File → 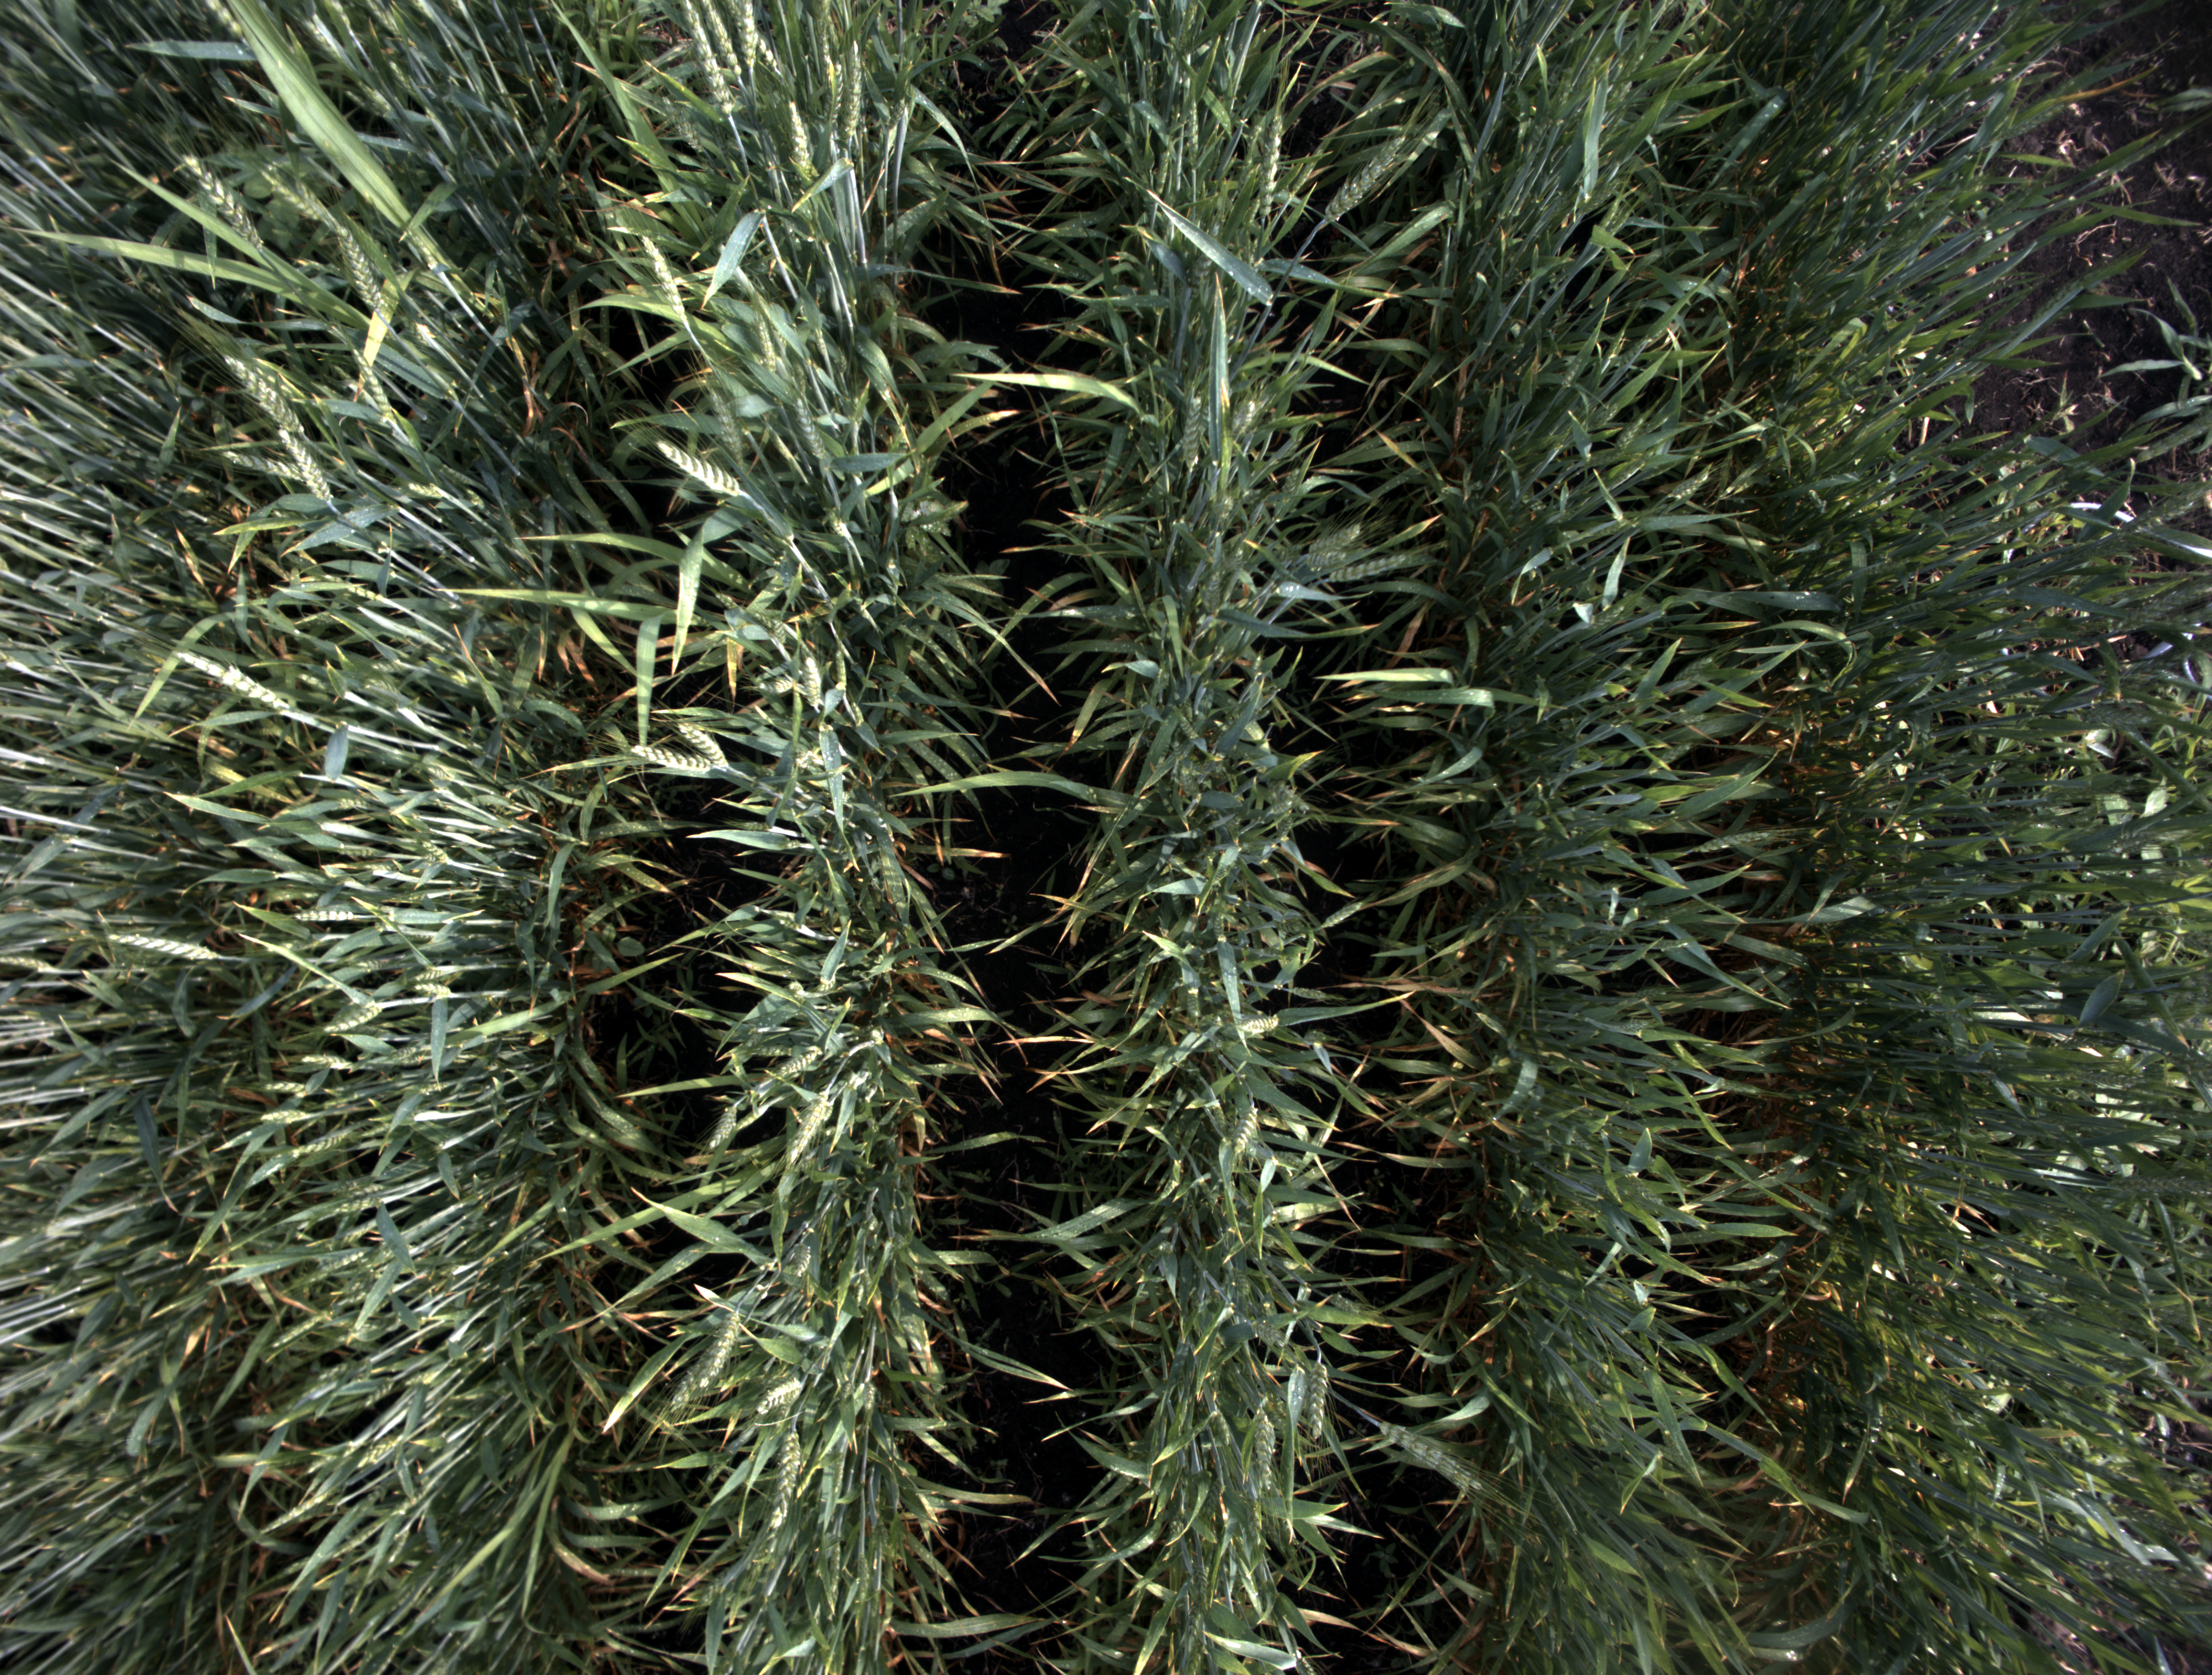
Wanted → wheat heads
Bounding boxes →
[640,232,685,315]
[2021,76,2080,113]
[1224,547,1243,572]
[337,798,371,810]
[743,819,771,832]
[2164,1049,2211,1084]
[2026,1307,2073,1328]
[301,1380,331,1398]
[1976,1357,2016,1380]
[332,1176,360,1194]
[754,1375,803,1413]
[696,1307,740,1389]
[1993,102,2062,141]
[1587,1358,1615,1388]
[276,429,333,501]
[2034,1274,2097,1304]
[1579,178,1622,214]
[390,56,417,95]
[1291,148,1321,195]
[350,1272,375,1292]
[741,0,759,69]
[1579,1199,1602,1215]
[818,976,836,991]
[1240,1490,1262,1545]
[368,1295,390,1316]
[792,359,806,394]
[1680,1540,1713,1574]
[1585,450,1644,469]
[863,1269,874,1296]
[1162,262,1170,287]
[817,335,828,355]
[835,647,846,685]
[296,672,329,692]
[842,790,851,802]
[1379,1417,1482,1493]
[775,118,793,156]
[1966,515,2025,535]
[702,0,742,77]
[861,1383,876,1411]
[364,676,402,696]
[409,227,437,265]
[775,1402,793,1429]
[1636,987,1667,998]
[1651,906,1688,921]
[2075,539,2136,559]
[656,439,741,496]
[837,38,864,139]
[332,1526,375,1559]
[1984,678,2009,691]
[337,1291,366,1306]
[1623,1330,1653,1354]
[220,450,303,480]
[1642,816,1671,828]
[2097,1560,2182,1590]
[2096,772,2143,796]
[1283,542,1304,555]
[1181,395,1204,468]
[227,663,278,700]
[363,1487,381,1505]
[779,916,800,930]
[1658,742,1691,763]
[2137,410,2211,462]
[1614,52,1645,97]
[2133,871,2165,882]
[787,979,804,991]
[1158,1239,1171,1252]
[1609,207,1633,234]
[1618,1099,1641,1116]
[318,1361,348,1381]
[420,1080,449,1093]
[364,861,393,872]
[1328,1291,1355,1314]
[1592,881,1623,892]
[427,767,450,780]
[319,1251,365,1273]
[1619,333,1649,370]
[408,479,443,499]
[1692,1558,1716,1599]
[294,910,357,924]
[791,1240,810,1277]
[1588,1184,1619,1203]
[696,1566,733,1607]
[268,1457,307,1470]
[1612,821,1638,836]
[1156,150,1169,185]
[390,1043,415,1060]
[1663,1429,1681,1464]
[1609,701,1635,713]
[2119,582,2211,636]
[1600,197,1622,227]
[343,1318,379,1330]
[1226,816,1241,830]
[1599,115,1624,149]
[1896,592,1981,616]
[753,1045,790,1058]
[1228,749,1245,761]
[1247,192,1260,222]
[1614,418,1644,451]
[828,510,845,536]
[1305,548,1347,568]
[346,91,384,118]
[303,1053,348,1066]
[2108,1175,2207,1193]
[2015,1240,2056,1266]
[1303,1030,1327,1044]
[1307,1363,1331,1439]
[404,1370,437,1387]
[1601,1120,1625,1137]
[1602,328,1626,361]
[1620,1018,1654,1032]
[2054,1449,2126,1485]
[820,1102,833,1122]
[366,0,403,39]
[753,762,776,778]
[329,575,379,601]
[1668,479,1703,500]
[1251,1318,1288,1349]
[1640,1055,1679,1069]
[336,226,385,312]
[327,0,352,30]
[259,168,323,221]
[1267,778,1309,813]
[260,1109,307,1125]
[1619,898,1653,919]
[735,1104,768,1130]
[1952,934,1981,941]
[2064,574,2098,593]
[1641,466,1673,482]
[408,932,436,941]
[1951,1009,1974,1025]
[1661,1449,1707,1475]
[1665,714,1707,726]
[1188,96,1199,156]
[1187,989,1200,1025]
[222,353,306,439]
[1863,558,1904,575]
[1972,185,2032,232]
[1273,1146,1302,1167]
[2120,490,2203,535]
[830,61,843,124]
[1531,114,1553,149]
[186,1159,226,1182]
[2073,1071,2152,1086]
[841,1380,853,1404]
[257,1491,326,1533]
[1252,1233,1274,1246]
[1328,555,1407,584]
[382,1248,395,1258]
[466,488,485,510]
[1931,504,1956,523]
[1260,1514,1288,1556]
[851,699,865,721]
[388,1582,416,1615]
[366,1380,395,1406]
[870,1590,880,1619]
[1672,659,1712,683]
[704,387,744,468]
[2066,802,2097,822]
[755,1625,768,1646]
[1307,522,1361,553]
[1248,124,1264,151]
[0,954,52,968]
[1213,905,1226,939]
[331,360,359,383]
[422,852,437,862]
[851,394,863,426]
[789,99,812,176]
[1576,56,1600,95]
[1988,931,2015,939]
[1230,400,1248,430]
[343,1438,364,1458]
[1251,654,1261,672]
[333,1195,379,1215]
[668,1337,722,1412]
[2079,705,2155,726]
[314,612,338,627]
[1213,646,1225,662]
[758,678,793,695]
[2172,604,2211,627]
[388,1529,410,1564]
[893,1230,906,1250]
[659,92,705,154]
[8,361,49,394]
[1232,1266,1251,1294]
[858,1553,869,1601]
[1587,605,1623,631]
[2113,829,2159,856]
[1721,1077,1756,1095]
[786,838,800,851]
[290,1131,348,1157]
[356,960,392,971]
[1271,798,1292,815]
[0,649,17,661]
[272,1311,326,1349]
[838,351,848,373]
[341,1225,369,1245]
[2179,968,2211,987]
[674,720,730,766]
[2038,961,2093,977]
[794,395,827,461]
[1598,927,1630,938]
[1259,113,1285,218]
[827,1540,841,1604]
[2119,649,2193,688]
[854,1283,864,1306]
[814,0,834,27]
[765,1423,801,1529]
[420,840,449,860]
[1561,357,1581,388]
[1180,765,1201,799]
[1322,902,1363,928]
[107,933,221,960]
[1650,938,1690,949]
[2032,269,2102,323]
[629,741,714,773]
[32,1212,76,1233]
[412,980,449,996]
[280,1555,311,1578]
[427,1657,453,1674]
[1256,1367,1283,1413]
[867,1216,878,1231]
[800,1155,821,1169]
[1212,1406,1230,1446]
[757,317,776,372]
[1625,1358,1647,1381]
[390,1484,426,1518]
[303,16,339,57]
[1575,1379,1603,1412]
[441,1264,460,1276]
[1201,571,1222,614]
[443,462,470,484]
[1249,238,1259,263]
[1956,319,1995,357]
[1159,1180,1178,1200]
[1620,651,1643,669]
[2041,1111,2109,1133]
[2098,1352,2147,1380]
[1275,921,1302,937]
[298,1502,334,1525]
[876,1515,889,1546]
[1695,831,1770,854]
[1651,1545,1688,1580]
[1167,1510,1185,1545]
[707,1103,737,1150]
[1240,1016,1280,1035]
[770,618,787,642]
[749,1525,781,1577]
[1257,709,1270,721]
[0,433,27,456]
[1280,1516,1299,1544]
[1191,1558,1208,1609]
[1213,868,1227,885]
[1571,1129,1593,1151]
[1241,488,1262,506]
[1293,985,1326,1002]
[1237,400,1256,437]
[1295,1655,1314,1675]
[764,1631,774,1647]
[369,657,400,674]
[353,1183,384,1195]
[832,1462,847,1495]
[308,1453,339,1474]
[779,1049,820,1078]
[1280,468,1301,494]
[356,78,377,100]
[2050,1034,2121,1051]
[1236,155,1253,193]
[1276,815,1292,842]
[792,993,806,1004]
[787,1088,830,1164]
[1259,1113,1282,1128]
[1249,1407,1271,1488]
[753,611,773,629]
[1199,405,1211,434]
[173,651,279,707]
[1183,11,1196,35]
[1974,432,2021,466]
[684,0,734,114]
[1549,186,1576,218]
[1262,859,1281,879]
[180,153,264,252]
[1937,748,1969,767]
[1914,1109,1953,1127]
[2114,1501,2178,1535]
[802,656,821,708]
[1183,1641,1204,1674]
[772,324,787,344]
[1628,1173,1665,1207]
[1218,496,1235,523]
[714,593,740,608]
[725,1,779,68]
[1226,1119,1243,1142]
[1608,458,1646,490]
[705,1457,728,1485]
[1323,136,1406,222]
[357,1433,400,1468]
[1586,402,1618,433]
[353,347,395,420]
[2075,619,2112,634]
[399,313,430,346]
[1172,740,1183,757]
[1184,1598,1199,1643]
[204,1,244,38]
[1190,223,1219,298]
[1595,519,1628,536]
[337,848,379,857]
[295,181,324,208]
[1554,425,1572,452]
[2067,1189,2117,1207]
[1179,715,1199,741]
[1212,1100,1228,1135]
[247,110,284,143]
[714,123,730,163]
[414,968,442,980]
[1258,1300,1272,1320]
[1232,1108,1257,1154]
[401,1052,422,1065]
[1554,92,1572,128]
[322,1005,380,1034]
[818,31,833,126]
[1202,1476,1222,1516]
[1276,1163,1291,1181]
[888,97,905,130]
[265,1080,307,1098]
